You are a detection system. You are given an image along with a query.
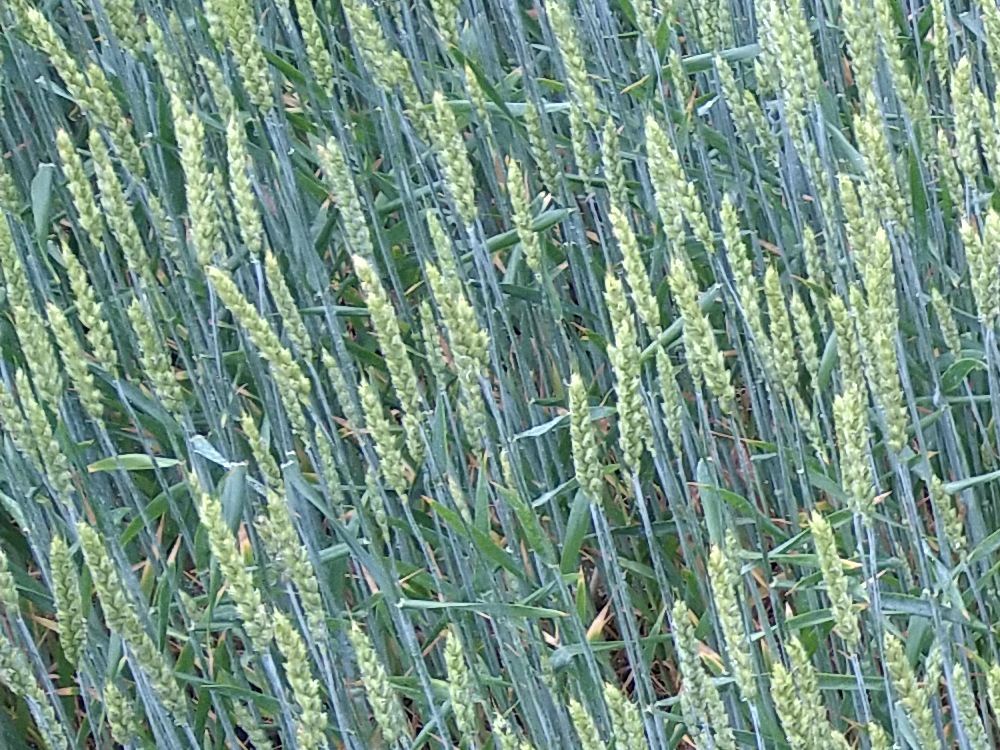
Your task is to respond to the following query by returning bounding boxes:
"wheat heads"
[764,1,803,109]
[0,216,41,321]
[874,231,908,447]
[92,0,146,52]
[77,525,143,638]
[786,640,836,750]
[707,549,757,699]
[930,476,963,548]
[359,382,409,491]
[195,0,224,48]
[770,667,834,750]
[46,306,103,419]
[567,126,596,185]
[507,159,541,274]
[54,128,103,243]
[0,0,32,31]
[264,252,313,358]
[393,50,418,110]
[833,391,876,513]
[145,19,193,107]
[127,302,185,421]
[271,366,310,439]
[874,0,912,107]
[931,290,960,357]
[190,484,274,652]
[669,50,691,109]
[703,680,745,750]
[668,265,734,410]
[714,57,752,144]
[671,603,707,740]
[422,265,488,410]
[84,69,146,178]
[882,635,940,750]
[849,114,872,184]
[694,0,717,48]
[950,665,993,750]
[973,91,999,185]
[77,528,190,722]
[607,694,665,750]
[566,701,630,750]
[241,416,286,498]
[951,60,980,182]
[15,371,76,498]
[146,195,189,273]
[610,344,648,469]
[930,0,950,86]
[646,150,680,249]
[646,118,714,240]
[315,425,346,513]
[600,125,627,213]
[174,125,223,262]
[955,126,983,190]
[354,1,381,89]
[623,701,658,750]
[435,92,476,220]
[266,495,327,642]
[569,377,603,497]
[838,177,869,281]
[49,539,86,663]
[419,302,453,391]
[319,148,336,195]
[351,258,422,411]
[348,624,405,740]
[784,0,820,95]
[455,300,494,355]
[61,241,118,372]
[802,226,827,312]
[226,124,265,253]
[229,0,265,68]
[779,103,823,186]
[604,277,640,351]
[848,290,881,402]
[604,687,642,750]
[217,0,273,108]
[231,702,277,750]
[656,346,685,455]
[868,724,901,750]
[867,230,899,335]
[206,268,306,393]
[865,126,910,221]
[455,397,484,450]
[26,11,94,113]
[619,0,654,39]
[718,197,758,309]
[737,284,771,372]
[427,212,465,299]
[465,61,488,127]
[610,211,660,331]
[810,514,859,642]
[841,0,877,109]
[273,615,325,739]
[322,351,363,432]
[985,214,1000,342]
[199,58,236,118]
[493,718,535,750]
[790,292,820,384]
[335,0,363,52]
[547,4,602,122]
[959,220,997,320]
[764,267,799,387]
[524,102,559,188]
[421,0,458,46]
[428,118,466,220]
[10,309,64,408]
[750,0,767,88]
[0,381,43,470]
[87,130,152,280]
[293,0,335,91]
[328,136,375,264]
[104,684,137,743]
[443,631,477,738]
[0,155,24,218]
[937,131,966,215]
[978,0,1000,82]
[743,91,779,163]
[788,390,827,452]
[0,635,68,750]
[828,298,862,393]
